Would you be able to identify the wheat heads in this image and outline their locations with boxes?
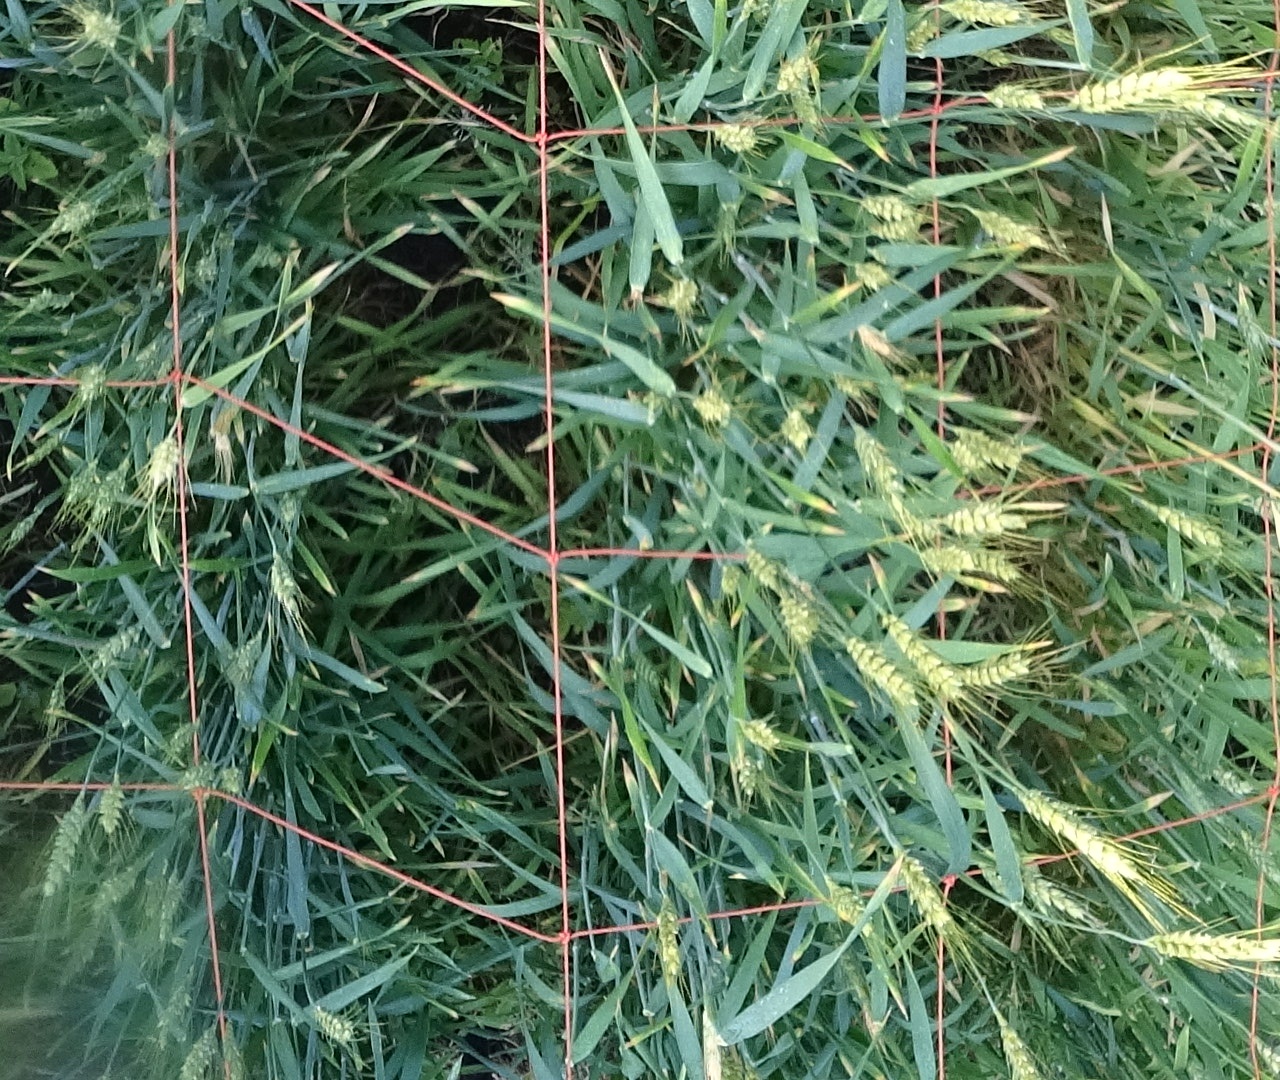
[779,407,814,453]
[905,517,947,543]
[1079,61,1189,118]
[153,982,195,1037]
[708,110,753,159]
[36,793,84,894]
[1177,92,1251,133]
[145,438,191,487]
[1151,505,1219,559]
[1234,830,1279,886]
[771,600,814,646]
[47,196,95,234]
[220,1025,238,1080]
[1135,928,1280,964]
[983,80,1049,124]
[914,543,1011,588]
[983,847,1109,938]
[1196,622,1240,676]
[947,499,1044,536]
[734,714,782,750]
[82,628,144,671]
[848,260,894,290]
[1011,787,1150,888]
[166,718,200,755]
[851,314,895,357]
[998,1020,1050,1080]
[823,887,869,928]
[653,899,684,979]
[977,208,1044,262]
[76,364,103,395]
[179,1028,215,1076]
[875,612,956,711]
[844,641,908,710]
[82,462,135,538]
[955,659,1034,692]
[259,558,297,615]
[934,0,1026,25]
[693,391,732,429]
[717,742,758,795]
[138,128,169,161]
[856,431,905,512]
[49,458,95,511]
[96,785,123,839]
[740,542,785,588]
[72,9,130,56]
[224,632,263,675]
[956,418,1018,473]
[658,274,698,318]
[946,439,978,478]
[770,48,817,92]
[856,192,910,217]
[315,1004,351,1051]
[870,216,921,243]
[894,857,967,944]
[217,760,241,802]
